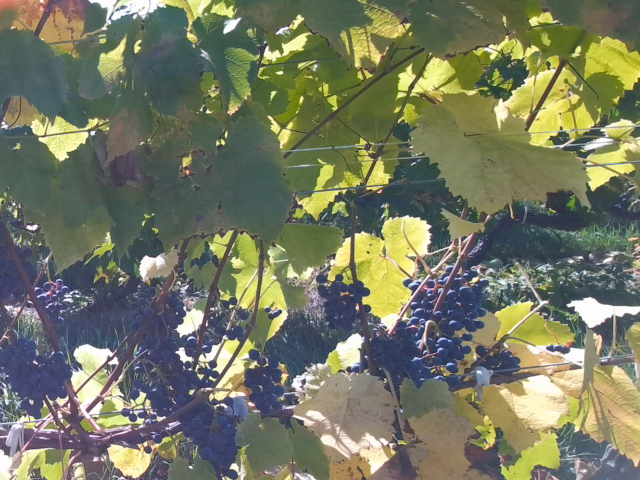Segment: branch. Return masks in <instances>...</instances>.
<instances>
[{"instance_id": "4", "label": "branch", "mask_w": 640, "mask_h": 480, "mask_svg": "<svg viewBox=\"0 0 640 480\" xmlns=\"http://www.w3.org/2000/svg\"><path fill=\"white\" fill-rule=\"evenodd\" d=\"M263 259H264V240L260 239L259 240V257H258L259 274H258V277H257V286H256V290H255V300L253 302L252 313H251V317H250V320H249V327H248V330L246 331V333L244 334L242 340L239 342L238 346L233 350V352L231 354V358L228 360V362L225 365V367L220 371V373L217 376L216 380L211 383V387L212 388H215L216 386H218L220 384V382L222 381L224 375L230 370V368L232 367L234 361L236 360V357H237L238 353L242 350L243 346L246 344V342L248 341L249 337L251 336V334L253 332L254 323H255V320H256V316H257L258 305H259V302H260V292H261V289H262V279L264 277Z\"/></svg>"}, {"instance_id": "7", "label": "branch", "mask_w": 640, "mask_h": 480, "mask_svg": "<svg viewBox=\"0 0 640 480\" xmlns=\"http://www.w3.org/2000/svg\"><path fill=\"white\" fill-rule=\"evenodd\" d=\"M363 193L364 189H357L356 194L350 203V237L347 269L353 280H356L358 278V273L356 271V269L358 268V264L355 262V249L357 239V205L360 202Z\"/></svg>"}, {"instance_id": "15", "label": "branch", "mask_w": 640, "mask_h": 480, "mask_svg": "<svg viewBox=\"0 0 640 480\" xmlns=\"http://www.w3.org/2000/svg\"><path fill=\"white\" fill-rule=\"evenodd\" d=\"M398 120H399V117H398L397 121H398ZM397 121H396V122H397ZM396 122H395V123H394V125L392 126L391 131H390V132H389V134L386 136V138L384 139V141H383V142L387 141L388 137L391 135V133H392V129H393V127L395 126Z\"/></svg>"}, {"instance_id": "3", "label": "branch", "mask_w": 640, "mask_h": 480, "mask_svg": "<svg viewBox=\"0 0 640 480\" xmlns=\"http://www.w3.org/2000/svg\"><path fill=\"white\" fill-rule=\"evenodd\" d=\"M425 52L424 48H420L416 51H414L413 53L409 54L408 56H406L405 58L391 63L390 66L385 70L382 71L381 73L375 75L372 79L370 83H367L365 85H363L360 90L355 93L351 98H349L348 100H346L345 102H343L342 104H340L338 106V108L332 112L328 118L322 120L320 123H318L316 126L312 127L305 135H303L299 141H297L293 146L292 149L295 148H299L306 140L309 139V137H311L315 132H317L318 130H320L323 126L327 125L328 123H330L336 116H338L343 109H345L347 106H349L350 104L354 103L359 97H361L364 92L367 89L373 88L377 85V82L379 79L384 78L385 76L389 75L391 73V71L394 68L400 67L402 65H404L405 63L409 62L410 60L414 59L415 57H417L418 55H421Z\"/></svg>"}, {"instance_id": "12", "label": "branch", "mask_w": 640, "mask_h": 480, "mask_svg": "<svg viewBox=\"0 0 640 480\" xmlns=\"http://www.w3.org/2000/svg\"><path fill=\"white\" fill-rule=\"evenodd\" d=\"M435 57L434 55H431L429 58L426 59V62L421 66L419 72L416 74V76L411 80L410 85L408 86V88L406 89V96L410 97L411 96V92L414 89L416 83L420 80V78L423 76V71L425 70L426 66L428 65V63L430 62V60Z\"/></svg>"}, {"instance_id": "8", "label": "branch", "mask_w": 640, "mask_h": 480, "mask_svg": "<svg viewBox=\"0 0 640 480\" xmlns=\"http://www.w3.org/2000/svg\"><path fill=\"white\" fill-rule=\"evenodd\" d=\"M210 395H211V391L207 390L203 395H201V396L195 398L194 400L190 401L185 406L175 410L168 417H166L165 419L161 420L160 422H158L156 424L148 425V426H145V427H142V428H137V429H128V430L120 431V432L115 433V434H113L111 436L102 437L100 439V442L101 443L110 442V441L116 440V439H118L120 437H123V436H126V435L140 434V433H144V432L151 431V430H154V429H158V428L162 427L163 425L169 423L171 420L176 418L179 414L191 409L197 403L203 401V399H207Z\"/></svg>"}, {"instance_id": "1", "label": "branch", "mask_w": 640, "mask_h": 480, "mask_svg": "<svg viewBox=\"0 0 640 480\" xmlns=\"http://www.w3.org/2000/svg\"><path fill=\"white\" fill-rule=\"evenodd\" d=\"M0 231L3 234V237L5 239V243H6V246H7V250L9 252V254H10V257L15 263V267L17 269V273L19 275V278L21 279L22 283L24 284L25 288L27 289V293L25 295V298L20 303L19 307L16 309V312L14 313L13 320L10 322V324L6 328L2 338L0 339V345H3L6 342L7 338L9 337V335H10V333L12 331V329L18 323L19 316H20L21 312L23 311L24 307L28 304L29 299H30L32 305L34 306L35 311L39 315L41 321L43 322V325H44L46 331L48 332V334L50 336L52 348L54 350H58L60 348V345L58 343V338H57L56 331L52 327V324H51L50 320L48 319V316L44 312L43 308L41 307L40 302L37 299V296L35 295V288L39 284L40 279L44 274V263L45 262H49L50 260H52L53 259V255L52 254H48L44 258L43 262L40 265L39 271L36 274V277H35L33 283H31L29 281V279H28V276L26 275V273L24 271V267H23L22 261H21L20 257L18 256V254H17V252H16V250L14 248V244H13L10 232L8 231L7 227L4 224L0 225Z\"/></svg>"}, {"instance_id": "11", "label": "branch", "mask_w": 640, "mask_h": 480, "mask_svg": "<svg viewBox=\"0 0 640 480\" xmlns=\"http://www.w3.org/2000/svg\"><path fill=\"white\" fill-rule=\"evenodd\" d=\"M359 306V311L361 314V318H362V323H363V344L365 346L366 352H367V361H368V366L370 369V374L374 375L375 374V367H374V363H373V359H372V349H371V345H370V334H369V330H368V321H367V316H366V311L364 309V303L363 302H359L358 303Z\"/></svg>"}, {"instance_id": "5", "label": "branch", "mask_w": 640, "mask_h": 480, "mask_svg": "<svg viewBox=\"0 0 640 480\" xmlns=\"http://www.w3.org/2000/svg\"><path fill=\"white\" fill-rule=\"evenodd\" d=\"M150 323H151V319L149 317H146L142 321V324L140 325V328H139L136 336L133 338V340L129 344L127 350L125 351L124 355L121 357V360L118 362L116 368L113 370V372L109 376V378L102 384V386L100 387L98 393H96L91 398V400L89 402V405L85 408V411L87 413H91L95 409L98 401L105 395L107 389L114 383V381L120 375L121 371L124 369V367L126 365V362L132 356L136 346L141 341V339L144 337V334L146 333L147 328H148Z\"/></svg>"}, {"instance_id": "2", "label": "branch", "mask_w": 640, "mask_h": 480, "mask_svg": "<svg viewBox=\"0 0 640 480\" xmlns=\"http://www.w3.org/2000/svg\"><path fill=\"white\" fill-rule=\"evenodd\" d=\"M476 239V235L474 233H470L467 237H465L459 244H457L455 247H453L450 252L446 255V257L439 262L431 271L430 274H427L423 280L421 281V283L419 284L418 287H416L410 294L409 298L407 299L405 305L400 309L399 314L394 318L392 326L390 327V329L388 330V335L390 337L394 336V331L396 330L399 321L403 318L406 310H408L412 304V302L414 301L416 295L425 287V285L427 284L428 280L433 279L434 276L436 275V273L443 267L445 266L450 259L454 256V254L462 248V252L461 254L456 258L454 265L452 266V270L451 273L449 274L447 280L443 283L442 289L440 291V294L438 296V298L436 299V301L434 302V309L431 312V316H429V320H432L433 322H435L437 324V320H435L433 318V312L435 310H439L441 308L442 303L444 302V300L447 297L448 291L450 289V286L453 284V282L455 281L458 273H459V269L461 268V265L463 263V261L467 258V256L469 255V250L473 244V241Z\"/></svg>"}, {"instance_id": "14", "label": "branch", "mask_w": 640, "mask_h": 480, "mask_svg": "<svg viewBox=\"0 0 640 480\" xmlns=\"http://www.w3.org/2000/svg\"><path fill=\"white\" fill-rule=\"evenodd\" d=\"M491 218H492V215H491V214H488V215H487L485 212H481V213L479 214V216H478V220H479L480 222H483V225H484V226H487V225H488V223H489V221H490V219H491Z\"/></svg>"}, {"instance_id": "13", "label": "branch", "mask_w": 640, "mask_h": 480, "mask_svg": "<svg viewBox=\"0 0 640 480\" xmlns=\"http://www.w3.org/2000/svg\"><path fill=\"white\" fill-rule=\"evenodd\" d=\"M383 150H384V147H378V150L376 151V153L373 156V162L371 163L370 167L368 168L366 176L362 180V184H367V182L370 180L371 175H372L374 169L376 168L377 159L380 157V155L382 154Z\"/></svg>"}, {"instance_id": "10", "label": "branch", "mask_w": 640, "mask_h": 480, "mask_svg": "<svg viewBox=\"0 0 640 480\" xmlns=\"http://www.w3.org/2000/svg\"><path fill=\"white\" fill-rule=\"evenodd\" d=\"M564 67H565V62L563 60H560L558 62L557 67L555 68V71L552 73L551 79L549 80V82L545 85V87L541 91L540 99L537 101L536 105L533 107V109L527 115V118L525 120V125L527 127H530L532 125V122H533L535 116L542 109V107H543V105L545 103V100L548 97L549 92L551 91V89L555 86V84L559 80V76L561 75L562 70L564 69Z\"/></svg>"}, {"instance_id": "9", "label": "branch", "mask_w": 640, "mask_h": 480, "mask_svg": "<svg viewBox=\"0 0 640 480\" xmlns=\"http://www.w3.org/2000/svg\"><path fill=\"white\" fill-rule=\"evenodd\" d=\"M188 243H189V239L185 238L183 240V243L180 246V249H179V252H178L177 263H175L172 266V270L168 274L164 284L162 285V288L159 290L154 302L152 303V310L154 312H157L159 310V305L161 304L162 300L164 299V296L168 292L171 284L173 283L175 277L177 276V274L179 272L180 267L182 266L183 255H184V252H185V249H186Z\"/></svg>"}, {"instance_id": "6", "label": "branch", "mask_w": 640, "mask_h": 480, "mask_svg": "<svg viewBox=\"0 0 640 480\" xmlns=\"http://www.w3.org/2000/svg\"><path fill=\"white\" fill-rule=\"evenodd\" d=\"M236 236H237V231L233 230L232 233H231V236H230V238H229V240H228V242L226 244V247H225V250H224V253H223V258L221 259V261L219 262V264H218V266L216 268V271H215L211 286L209 287L208 297H207V301H206V304H205L204 313H203V316H202V325H201L200 330L198 332V341H197V344H196L194 357H193L192 363H191V369L192 370L196 369L197 361H198L199 356H200L201 347H202V344H203V341H204L203 335H204L205 330L207 328V319H208L209 312H210V307H211V304H212L214 290L216 289V285H217L220 273H221V271H222V269L224 267V264L228 260L230 249H231V247H232V245H233V243L235 241Z\"/></svg>"}]
</instances>
